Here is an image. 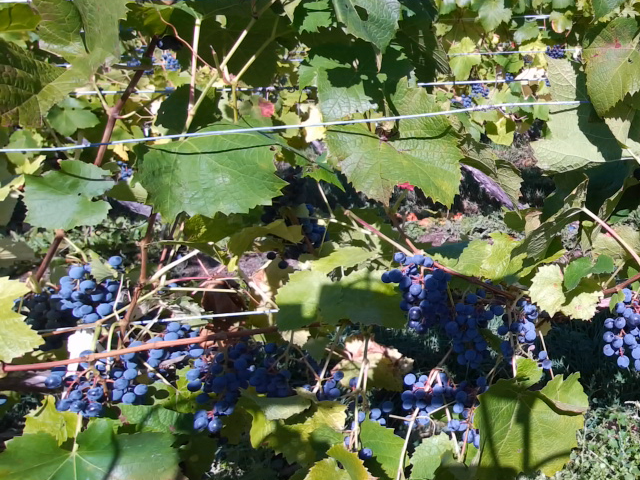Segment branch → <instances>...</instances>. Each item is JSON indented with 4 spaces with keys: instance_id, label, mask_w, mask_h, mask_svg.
Returning a JSON list of instances; mask_svg holds the SVG:
<instances>
[{
    "instance_id": "branch-1",
    "label": "branch",
    "mask_w": 640,
    "mask_h": 480,
    "mask_svg": "<svg viewBox=\"0 0 640 480\" xmlns=\"http://www.w3.org/2000/svg\"><path fill=\"white\" fill-rule=\"evenodd\" d=\"M158 213L153 211L149 220L147 221L146 227L144 228L142 237L140 239V266H141V280L137 290L135 291L132 298L129 300L127 304L126 311L124 314L125 324L121 327L117 339V348L118 349H108L104 352L94 353L88 356H82L80 358H67L62 360H57L54 362H44L39 364L33 363H21V364H6L4 369L6 371H23V370H31V371H41L46 369H57L59 367L69 366V365H82L84 363H91L97 360H103L110 356H124L133 353H139L144 351H150L154 349H163V348H171L180 345H188V344H196L203 342H216L225 340L228 338L243 336V335H258V334H270L273 331L271 326L268 327H256V328H241L234 329L230 331H226L219 334L214 335H200L194 337H186V338H178L169 341H161V342H152L148 344H141L137 346H130L124 348V341L126 337V333L128 331V327L126 326V322L131 320V316L133 313L134 306L136 302L141 297L144 289L146 288L148 282V264H147V241L150 237L151 230L153 229L154 223L157 221Z\"/></svg>"
},
{
    "instance_id": "branch-2",
    "label": "branch",
    "mask_w": 640,
    "mask_h": 480,
    "mask_svg": "<svg viewBox=\"0 0 640 480\" xmlns=\"http://www.w3.org/2000/svg\"><path fill=\"white\" fill-rule=\"evenodd\" d=\"M274 3H275V0H267L255 8L251 16L248 18V21L245 23V26L239 31L238 35L229 44V48L226 50L224 58L212 70V73L210 74V76L205 80L203 87L199 90L198 94L196 95V99L194 101L195 81H196L197 65L199 62V53H200L201 44H202V24H203V20L201 18H198L196 20L195 42H194V47L192 51V60L190 63V71H189V79H188V94H187V100L185 101V125L182 127V130L184 132H190L192 130V119L195 117L196 113L198 112L199 107L203 101V97L209 91L210 87L214 83V80L221 73L222 69L230 62L233 56V53L236 50V47L245 37L246 33L251 30L252 25L255 23V20L258 18V16L265 9L272 6Z\"/></svg>"
},
{
    "instance_id": "branch-3",
    "label": "branch",
    "mask_w": 640,
    "mask_h": 480,
    "mask_svg": "<svg viewBox=\"0 0 640 480\" xmlns=\"http://www.w3.org/2000/svg\"><path fill=\"white\" fill-rule=\"evenodd\" d=\"M159 42H160V38L158 36H155L153 38V40H152V44L149 46L148 53L146 54L145 60L143 61L141 66L138 68V70L132 75L128 85L124 89V93L122 94V96L119 99V102L113 108V110L111 111V113H110V115L108 117L107 125H106L105 131H104V135H103L102 140L100 142V146L97 148L96 153H95V165L97 167H100L102 165V155H103V152L107 148V144L109 142V139L111 138V133H112V130H113V127H114L115 119H116L117 115L119 114L120 110L126 104V101L129 98L130 93L133 90V88L135 87L136 83L138 82V79L142 78L144 76L145 71L147 70L148 66L152 62L153 56L155 54V51H156L157 47L159 46Z\"/></svg>"
},
{
    "instance_id": "branch-4",
    "label": "branch",
    "mask_w": 640,
    "mask_h": 480,
    "mask_svg": "<svg viewBox=\"0 0 640 480\" xmlns=\"http://www.w3.org/2000/svg\"><path fill=\"white\" fill-rule=\"evenodd\" d=\"M64 236H65V229L63 227H60L58 229L57 237H56V240L54 241L53 246L51 247L49 252L44 257V259H43L42 263L40 264V266L37 268V270L33 274V281L35 283H38L40 281V276L47 269V266L49 265L51 259L53 258V256L56 254V252L60 248L61 243L64 240Z\"/></svg>"
},
{
    "instance_id": "branch-5",
    "label": "branch",
    "mask_w": 640,
    "mask_h": 480,
    "mask_svg": "<svg viewBox=\"0 0 640 480\" xmlns=\"http://www.w3.org/2000/svg\"><path fill=\"white\" fill-rule=\"evenodd\" d=\"M638 281H640V273L635 274L632 278L627 279L626 281H624L623 283H620L619 285L613 286L605 290L603 292V295L605 297H609L615 293L622 292L623 290L627 289L629 286L636 284Z\"/></svg>"
}]
</instances>
